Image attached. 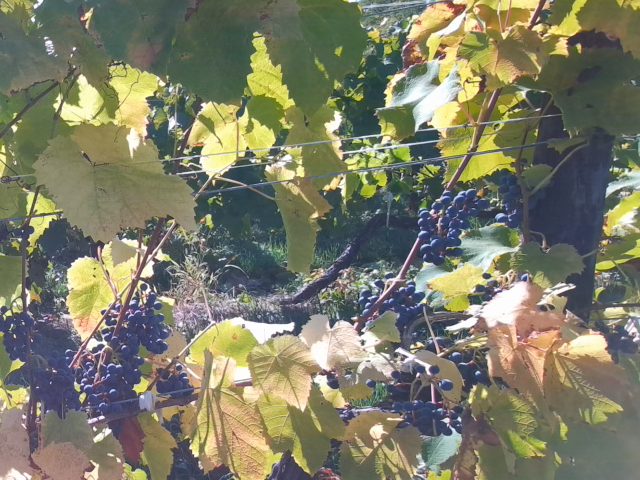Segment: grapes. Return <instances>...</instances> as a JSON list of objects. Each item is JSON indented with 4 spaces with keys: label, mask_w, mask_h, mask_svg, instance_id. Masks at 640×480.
Returning a JSON list of instances; mask_svg holds the SVG:
<instances>
[{
    "label": "grapes",
    "mask_w": 640,
    "mask_h": 480,
    "mask_svg": "<svg viewBox=\"0 0 640 480\" xmlns=\"http://www.w3.org/2000/svg\"><path fill=\"white\" fill-rule=\"evenodd\" d=\"M140 293L135 291L128 304L125 320L129 322L122 326L118 336L113 335L114 326L117 324L118 314L108 316L104 323L108 328H103L101 333L106 342H112L119 346L117 354H121L118 363H107L100 366V379L102 384L92 386L97 375L95 360L87 358L82 361L85 368L77 367L74 371L68 364L73 357V349L64 351V356L58 350L50 353L48 366L56 371L47 372L42 368L34 369V382L39 388L32 391V395L42 403L45 411L57 412L60 418L66 416V406L69 409L79 411L81 407L80 393L74 389V383L79 384L82 393H85L88 404H98V410L102 415L129 411L132 404H118L111 406L109 402L116 399H130L137 396L133 390L134 385L142 382V370L139 366L145 364L143 357H134L140 353L141 345L154 355H163L169 351V344L164 341L169 338L165 315L157 313L163 308V304L157 301L154 291L147 293V303L140 305Z\"/></svg>",
    "instance_id": "grapes-1"
},
{
    "label": "grapes",
    "mask_w": 640,
    "mask_h": 480,
    "mask_svg": "<svg viewBox=\"0 0 640 480\" xmlns=\"http://www.w3.org/2000/svg\"><path fill=\"white\" fill-rule=\"evenodd\" d=\"M452 200V192L445 190L441 193L440 203L431 205L432 209H442L443 205L449 206L444 210L445 216L439 219L440 228L447 230L446 236L432 235L436 230L437 218L431 216L426 207H421L418 210L420 218L418 225L421 230L418 233V238L427 240L430 237V243H422L419 248V253L423 255L425 263L441 266L444 263V255L446 257L461 258L463 256L462 248L446 249V246H459L461 239L458 236L462 234V230L470 227V222L466 217L468 215H478L483 208L489 205V200L476 196L474 189L459 191L454 197L456 205H450Z\"/></svg>",
    "instance_id": "grapes-2"
},
{
    "label": "grapes",
    "mask_w": 640,
    "mask_h": 480,
    "mask_svg": "<svg viewBox=\"0 0 640 480\" xmlns=\"http://www.w3.org/2000/svg\"><path fill=\"white\" fill-rule=\"evenodd\" d=\"M392 409L395 412L407 411L404 414V421L396 424L397 428L407 427L413 423L412 411L414 410V417L417 418L416 424L420 432L430 434L433 426L437 427V434H443L446 437L452 436V429L446 426L443 419L446 416V410L438 408L434 404L433 400L413 399L411 402L404 400L395 401L392 404Z\"/></svg>",
    "instance_id": "grapes-3"
},
{
    "label": "grapes",
    "mask_w": 640,
    "mask_h": 480,
    "mask_svg": "<svg viewBox=\"0 0 640 480\" xmlns=\"http://www.w3.org/2000/svg\"><path fill=\"white\" fill-rule=\"evenodd\" d=\"M33 326L34 320L27 312H16L6 320L0 315V331L4 334L1 344L6 346L5 351L9 353L10 361H15L17 358L21 363L27 361L26 330Z\"/></svg>",
    "instance_id": "grapes-4"
},
{
    "label": "grapes",
    "mask_w": 640,
    "mask_h": 480,
    "mask_svg": "<svg viewBox=\"0 0 640 480\" xmlns=\"http://www.w3.org/2000/svg\"><path fill=\"white\" fill-rule=\"evenodd\" d=\"M517 180V176H514L509 169L501 170L499 193L503 194L502 205L505 212L497 213L494 221L505 223L510 229H516L517 224H520L523 219V203L512 201L513 198L523 199Z\"/></svg>",
    "instance_id": "grapes-5"
},
{
    "label": "grapes",
    "mask_w": 640,
    "mask_h": 480,
    "mask_svg": "<svg viewBox=\"0 0 640 480\" xmlns=\"http://www.w3.org/2000/svg\"><path fill=\"white\" fill-rule=\"evenodd\" d=\"M415 286L416 283L414 281H407L406 287L401 286L399 290H395L393 298H388L382 304L384 311L391 310L392 313L400 314L396 322L397 329H403L405 324L408 323L413 316L421 313L424 309L422 304L406 307L405 303L398 302L403 298L404 293L406 296H412L414 303H421L425 298V294L423 292L415 293Z\"/></svg>",
    "instance_id": "grapes-6"
},
{
    "label": "grapes",
    "mask_w": 640,
    "mask_h": 480,
    "mask_svg": "<svg viewBox=\"0 0 640 480\" xmlns=\"http://www.w3.org/2000/svg\"><path fill=\"white\" fill-rule=\"evenodd\" d=\"M175 369L180 372L178 373V375H172V376L169 370H166L164 368H159L157 370V374L159 376H162V379L164 380V381L159 380L157 382L156 384L157 392L170 391L178 388L193 386L188 384L189 383L188 373L186 371H181L183 369V366L181 364H177L175 366Z\"/></svg>",
    "instance_id": "grapes-7"
},
{
    "label": "grapes",
    "mask_w": 640,
    "mask_h": 480,
    "mask_svg": "<svg viewBox=\"0 0 640 480\" xmlns=\"http://www.w3.org/2000/svg\"><path fill=\"white\" fill-rule=\"evenodd\" d=\"M491 277H492V274L490 272H483L482 273V278L483 279H489L488 283L491 284V286H485L484 284H476L475 285V291L476 292H485L481 296V300L483 302L490 301L498 293H502L503 291H507V289H495L494 290V288L499 286V283H498L497 279H490Z\"/></svg>",
    "instance_id": "grapes-8"
},
{
    "label": "grapes",
    "mask_w": 640,
    "mask_h": 480,
    "mask_svg": "<svg viewBox=\"0 0 640 480\" xmlns=\"http://www.w3.org/2000/svg\"><path fill=\"white\" fill-rule=\"evenodd\" d=\"M379 297V295H373L371 296V290L370 289H363L362 292L360 293V297L358 298V302L360 304H365L364 305V310L362 311V315H365L368 313V311L370 310V307L373 305V303L376 301V299Z\"/></svg>",
    "instance_id": "grapes-9"
},
{
    "label": "grapes",
    "mask_w": 640,
    "mask_h": 480,
    "mask_svg": "<svg viewBox=\"0 0 640 480\" xmlns=\"http://www.w3.org/2000/svg\"><path fill=\"white\" fill-rule=\"evenodd\" d=\"M447 359L455 364L457 370L461 373H467L469 370V366L466 362H461L462 356L458 351H454L453 353L447 356Z\"/></svg>",
    "instance_id": "grapes-10"
},
{
    "label": "grapes",
    "mask_w": 640,
    "mask_h": 480,
    "mask_svg": "<svg viewBox=\"0 0 640 480\" xmlns=\"http://www.w3.org/2000/svg\"><path fill=\"white\" fill-rule=\"evenodd\" d=\"M461 413H462L461 406H455L452 408L451 426L457 431L458 434H461L463 432V429L461 427V422L457 420L458 417L461 415Z\"/></svg>",
    "instance_id": "grapes-11"
},
{
    "label": "grapes",
    "mask_w": 640,
    "mask_h": 480,
    "mask_svg": "<svg viewBox=\"0 0 640 480\" xmlns=\"http://www.w3.org/2000/svg\"><path fill=\"white\" fill-rule=\"evenodd\" d=\"M35 232V228L33 226H26L24 228V232L20 228H15L13 230V235L15 237H21L23 240L28 238V235H32Z\"/></svg>",
    "instance_id": "grapes-12"
},
{
    "label": "grapes",
    "mask_w": 640,
    "mask_h": 480,
    "mask_svg": "<svg viewBox=\"0 0 640 480\" xmlns=\"http://www.w3.org/2000/svg\"><path fill=\"white\" fill-rule=\"evenodd\" d=\"M32 339L35 341V342H32L31 344L32 350H36L38 348L37 343H42L44 341V336L40 333H35L32 336Z\"/></svg>",
    "instance_id": "grapes-13"
},
{
    "label": "grapes",
    "mask_w": 640,
    "mask_h": 480,
    "mask_svg": "<svg viewBox=\"0 0 640 480\" xmlns=\"http://www.w3.org/2000/svg\"><path fill=\"white\" fill-rule=\"evenodd\" d=\"M192 393H194V391L180 393V394H177V395H172L171 397L172 398H182V397L190 396V395H192Z\"/></svg>",
    "instance_id": "grapes-14"
}]
</instances>
